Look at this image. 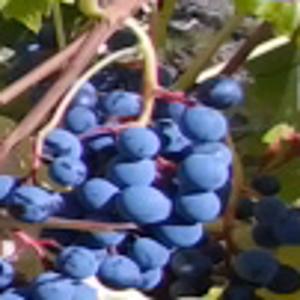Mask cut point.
Instances as JSON below:
<instances>
[{
	"instance_id": "6a23745f",
	"label": "cut point",
	"mask_w": 300,
	"mask_h": 300,
	"mask_svg": "<svg viewBox=\"0 0 300 300\" xmlns=\"http://www.w3.org/2000/svg\"><path fill=\"white\" fill-rule=\"evenodd\" d=\"M127 29L142 43V60L146 77V90L143 101L151 105L159 95V73L155 55V37L148 28L135 18L126 22Z\"/></svg>"
}]
</instances>
